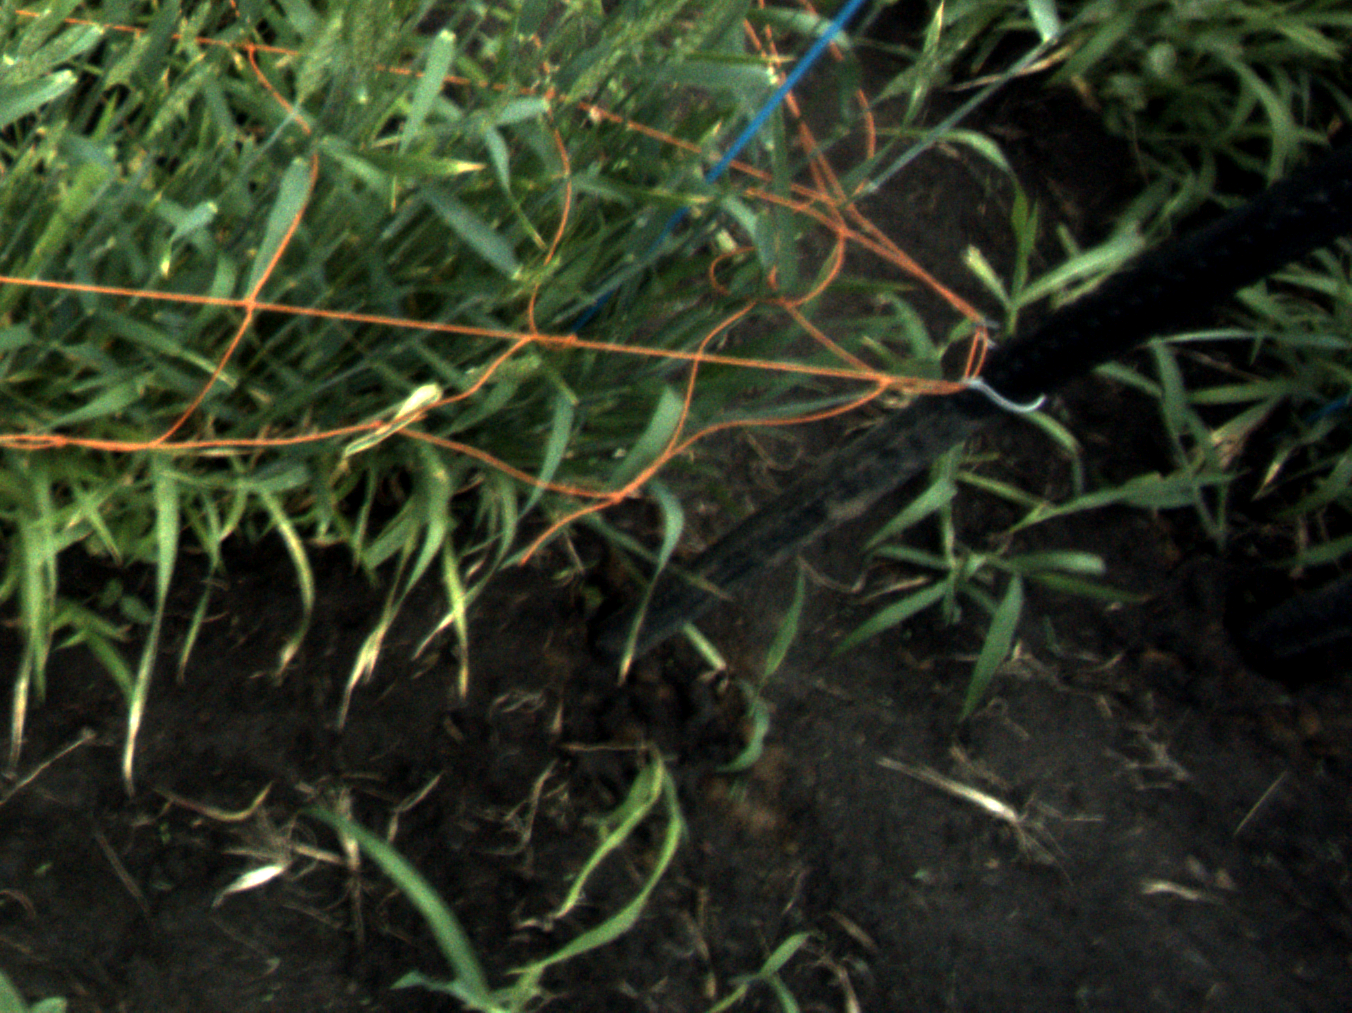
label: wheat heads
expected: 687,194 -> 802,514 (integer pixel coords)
12,7 -> 52,59
371,19 -> 401,61
561,49 -> 624,113
144,62 -> 214,138
295,14 -> 342,95
676,0 -> 729,57
101,37 -> 150,94
607,0 -> 692,47
346,0 -> 379,78
376,0 -> 399,39
528,258 -> 560,292
0,25 -> 89,89
180,0 -> 209,50
560,0 -> 631,23
878,39 -> 970,96
0,0 -> 24,60
468,357 -> 541,385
